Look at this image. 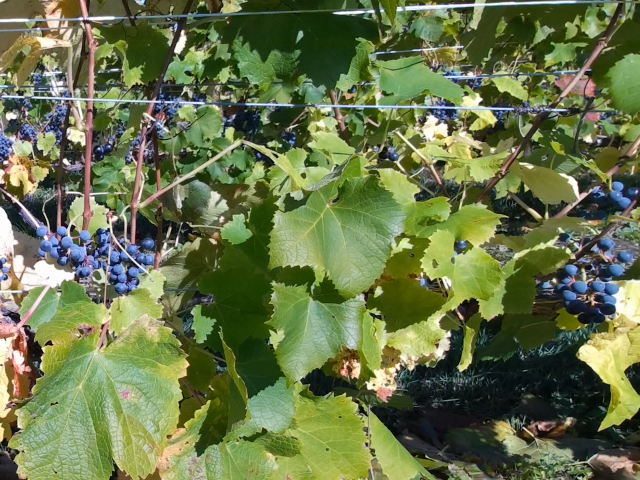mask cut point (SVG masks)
I'll use <instances>...</instances> for the list:
<instances>
[{
    "instance_id": "6a23745f",
    "label": "cut point",
    "mask_w": 640,
    "mask_h": 480,
    "mask_svg": "<svg viewBox=\"0 0 640 480\" xmlns=\"http://www.w3.org/2000/svg\"><path fill=\"white\" fill-rule=\"evenodd\" d=\"M129 208H130V205H126L121 209V220H124V231H127V217H126V214H124V212Z\"/></svg>"
}]
</instances>
